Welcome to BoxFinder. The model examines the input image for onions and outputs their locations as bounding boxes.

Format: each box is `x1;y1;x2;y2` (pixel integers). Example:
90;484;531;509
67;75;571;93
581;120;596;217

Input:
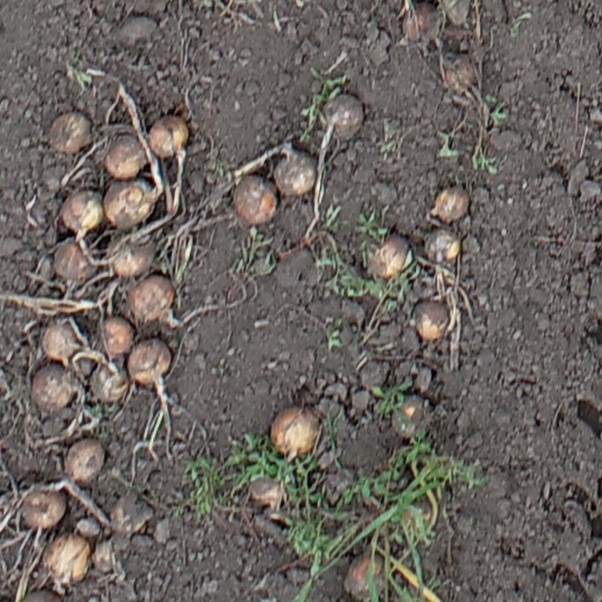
432;187;467;222
22;488;63;529
102;132;148;178
246;473;280;508
402;6;434;40
124;340;170;381
98;315;136;356
391;397;426;435
60;192;105;231
51;242;89;280
409;301;447;341
275;153;315;196
230;177;277;226
31;365;81;414
113;495;148;535
123;276;174;323
89;363;126;402
92;536;118;572
322;97;363;130
148;116;187;155
344;551;377;592
270;405;320;456
367;234;411;275
111;236;151;275
42;535;91;582
424;230;460;261
42;321;80;359
103;180;151;226
443;58;474;93
64;440;105;483
48;112;92;154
